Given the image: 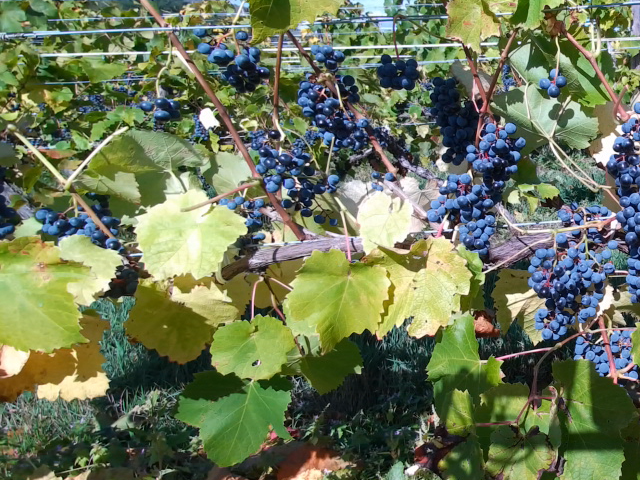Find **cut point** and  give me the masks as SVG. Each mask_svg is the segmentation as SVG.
<instances>
[{
	"label": "cut point",
	"instance_id": "1",
	"mask_svg": "<svg viewBox=\"0 0 640 480\" xmlns=\"http://www.w3.org/2000/svg\"><path fill=\"white\" fill-rule=\"evenodd\" d=\"M172 44H173V43L168 39V41H167V48H166V51H167V54H166V64H165V66H164L162 69H160V70H159V72H158V75H159V76H162L164 73H166V72L169 70L170 66H171V50H172Z\"/></svg>",
	"mask_w": 640,
	"mask_h": 480
},
{
	"label": "cut point",
	"instance_id": "2",
	"mask_svg": "<svg viewBox=\"0 0 640 480\" xmlns=\"http://www.w3.org/2000/svg\"><path fill=\"white\" fill-rule=\"evenodd\" d=\"M418 28L421 30V32L426 33V34H428V35H430V36H432V37H434V38H436L438 40L447 41V42H459V39H449V38L438 36V35L430 32V31L424 29V27L422 25H418Z\"/></svg>",
	"mask_w": 640,
	"mask_h": 480
},
{
	"label": "cut point",
	"instance_id": "3",
	"mask_svg": "<svg viewBox=\"0 0 640 480\" xmlns=\"http://www.w3.org/2000/svg\"><path fill=\"white\" fill-rule=\"evenodd\" d=\"M244 6H245V3H244V2H241V3L239 4V7H238V8H237V10L235 11L234 16H233V18H232V22H233V23H236V22H237V20H238V18H239V15L241 14V12H242V11H243V9H244Z\"/></svg>",
	"mask_w": 640,
	"mask_h": 480
}]
</instances>
